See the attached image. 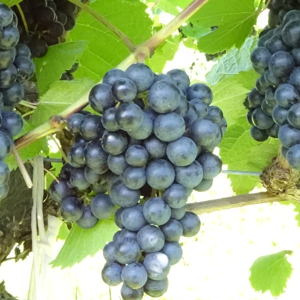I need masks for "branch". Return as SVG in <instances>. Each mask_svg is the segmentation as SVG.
Returning a JSON list of instances; mask_svg holds the SVG:
<instances>
[{
  "instance_id": "30e6481e",
  "label": "branch",
  "mask_w": 300,
  "mask_h": 300,
  "mask_svg": "<svg viewBox=\"0 0 300 300\" xmlns=\"http://www.w3.org/2000/svg\"><path fill=\"white\" fill-rule=\"evenodd\" d=\"M207 0H193L182 12H180L173 20H171L165 27L153 35L150 39L141 43L130 55L125 57L119 65L115 68L126 70L133 65L137 59L150 58L154 49L158 44L171 35L177 28H179L185 21H187L197 10L203 6Z\"/></svg>"
},
{
  "instance_id": "325d2c04",
  "label": "branch",
  "mask_w": 300,
  "mask_h": 300,
  "mask_svg": "<svg viewBox=\"0 0 300 300\" xmlns=\"http://www.w3.org/2000/svg\"><path fill=\"white\" fill-rule=\"evenodd\" d=\"M284 195L282 193H256L250 195H239L232 197H223L222 199L206 200L201 202H189L184 205L186 212H193L196 215H203L211 212L225 210L246 205H257L265 202H282Z\"/></svg>"
},
{
  "instance_id": "170604dd",
  "label": "branch",
  "mask_w": 300,
  "mask_h": 300,
  "mask_svg": "<svg viewBox=\"0 0 300 300\" xmlns=\"http://www.w3.org/2000/svg\"><path fill=\"white\" fill-rule=\"evenodd\" d=\"M102 80L98 82L97 85L101 84ZM95 85L93 88H95ZM93 88L87 93L83 94L78 100L72 103L70 106L65 107L59 112L58 115H52L49 120L38 125L31 131L23 134L18 140L14 142V147L16 149L24 148L28 143L34 141L35 139H40L52 132H56L63 128L68 121V118L74 114L77 110L84 109L89 102V95Z\"/></svg>"
}]
</instances>
